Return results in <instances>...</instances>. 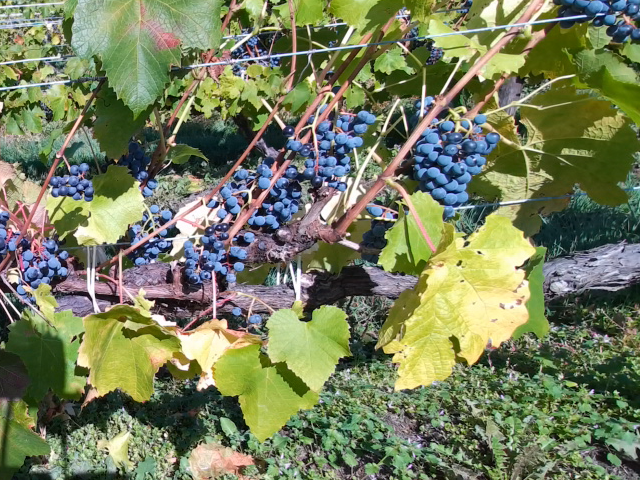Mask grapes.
I'll use <instances>...</instances> for the list:
<instances>
[{"instance_id":"obj_11","label":"grapes","mask_w":640,"mask_h":480,"mask_svg":"<svg viewBox=\"0 0 640 480\" xmlns=\"http://www.w3.org/2000/svg\"><path fill=\"white\" fill-rule=\"evenodd\" d=\"M365 211L373 217H382L384 215V217L389 220H392L394 218V215L391 212H386L384 214L382 209L373 203H370L369 206L365 209Z\"/></svg>"},{"instance_id":"obj_8","label":"grapes","mask_w":640,"mask_h":480,"mask_svg":"<svg viewBox=\"0 0 640 480\" xmlns=\"http://www.w3.org/2000/svg\"><path fill=\"white\" fill-rule=\"evenodd\" d=\"M174 226L175 224L167 230L159 233V235L155 236L142 247L130 252L127 255V259L129 261H134L136 266H145L156 262L158 260L159 253H164L166 249H170L172 247V242H165L163 238L170 236L169 230L173 229Z\"/></svg>"},{"instance_id":"obj_6","label":"grapes","mask_w":640,"mask_h":480,"mask_svg":"<svg viewBox=\"0 0 640 480\" xmlns=\"http://www.w3.org/2000/svg\"><path fill=\"white\" fill-rule=\"evenodd\" d=\"M274 165V159L272 157H267L262 161V165H257L255 167V172H248L245 168H238L234 172V180L236 182H241L245 180L247 183L253 181L257 175H260L258 178L257 188L259 190L268 188L270 186V178L273 176V170L271 167ZM229 182L223 188L219 190V195L225 199L224 205L228 208H219L216 211V216L219 219H226L228 215L238 214L241 211V207L239 205V199L234 197L233 193L240 192L247 188L245 183ZM242 198H246L248 193L246 191H242L240 193Z\"/></svg>"},{"instance_id":"obj_2","label":"grapes","mask_w":640,"mask_h":480,"mask_svg":"<svg viewBox=\"0 0 640 480\" xmlns=\"http://www.w3.org/2000/svg\"><path fill=\"white\" fill-rule=\"evenodd\" d=\"M455 129L453 121L426 128L416 142L415 168L409 178L420 181L419 190L431 193L435 201H443L444 216L453 218L455 206L468 200V183L472 175L482 172L487 156L499 146L500 135L466 138Z\"/></svg>"},{"instance_id":"obj_5","label":"grapes","mask_w":640,"mask_h":480,"mask_svg":"<svg viewBox=\"0 0 640 480\" xmlns=\"http://www.w3.org/2000/svg\"><path fill=\"white\" fill-rule=\"evenodd\" d=\"M228 229L229 225L226 222H222L219 225L213 223L205 228L201 243L217 252L210 253L205 250L201 255L199 252H195L191 241H186L183 244V255L187 258L184 261L183 274L189 278L190 282L198 285L202 283V280H211L213 278L212 271H219V274L224 276L227 282L236 280V275L229 272L228 268L219 261L224 260L228 254L232 257H237L239 260H246L247 250L241 247H232L229 251L224 249V241L230 238V234L227 232Z\"/></svg>"},{"instance_id":"obj_12","label":"grapes","mask_w":640,"mask_h":480,"mask_svg":"<svg viewBox=\"0 0 640 480\" xmlns=\"http://www.w3.org/2000/svg\"><path fill=\"white\" fill-rule=\"evenodd\" d=\"M421 104H422V100L420 98H417L414 102H413V107L416 109V112L410 117L409 119V123L415 127V125L418 123L419 120V116L421 114Z\"/></svg>"},{"instance_id":"obj_9","label":"grapes","mask_w":640,"mask_h":480,"mask_svg":"<svg viewBox=\"0 0 640 480\" xmlns=\"http://www.w3.org/2000/svg\"><path fill=\"white\" fill-rule=\"evenodd\" d=\"M129 153L123 155L118 159L120 166H127L128 174L135 180H146L149 177L146 165L151 161V158L144 155L145 150L140 146L138 141L130 140L128 142Z\"/></svg>"},{"instance_id":"obj_10","label":"grapes","mask_w":640,"mask_h":480,"mask_svg":"<svg viewBox=\"0 0 640 480\" xmlns=\"http://www.w3.org/2000/svg\"><path fill=\"white\" fill-rule=\"evenodd\" d=\"M142 226L140 224H135L133 227H131L128 230V234L130 235L131 239V246L140 242L142 239H144L148 233L146 231H142Z\"/></svg>"},{"instance_id":"obj_13","label":"grapes","mask_w":640,"mask_h":480,"mask_svg":"<svg viewBox=\"0 0 640 480\" xmlns=\"http://www.w3.org/2000/svg\"><path fill=\"white\" fill-rule=\"evenodd\" d=\"M487 121V116L485 114L476 115L474 117V122L476 126L473 127L474 134H481L483 132V127L481 125L485 124Z\"/></svg>"},{"instance_id":"obj_3","label":"grapes","mask_w":640,"mask_h":480,"mask_svg":"<svg viewBox=\"0 0 640 480\" xmlns=\"http://www.w3.org/2000/svg\"><path fill=\"white\" fill-rule=\"evenodd\" d=\"M10 214L7 211L0 213V254L6 255L8 251L22 252L19 255L21 277L16 281L17 293L27 303L35 301V295L27 290L28 285L31 289H37L39 284H49L51 277L66 276L68 269L61 264L60 260H68L70 258L69 251H59V244L51 237H43L41 239L42 249L40 254L34 252L32 248V240L30 238H21L19 231H13L7 234L8 221Z\"/></svg>"},{"instance_id":"obj_1","label":"grapes","mask_w":640,"mask_h":480,"mask_svg":"<svg viewBox=\"0 0 640 480\" xmlns=\"http://www.w3.org/2000/svg\"><path fill=\"white\" fill-rule=\"evenodd\" d=\"M376 121L377 115L367 110L358 112L356 116L340 114L334 121V126L341 129L337 134L330 130V120H322L315 128L317 151L312 142L302 144L296 138H291L295 133L294 126L286 125L281 132L283 138H289L284 142V148L307 158L303 162L306 169L298 172L295 165H289L273 190L247 220V224L270 225L272 229H277L283 221H291L293 213L299 211L301 183L305 180H311L313 187H320L325 183L334 190L345 191L347 184L334 179L350 173V157L347 154L364 144V138L360 135L366 134L368 127Z\"/></svg>"},{"instance_id":"obj_4","label":"grapes","mask_w":640,"mask_h":480,"mask_svg":"<svg viewBox=\"0 0 640 480\" xmlns=\"http://www.w3.org/2000/svg\"><path fill=\"white\" fill-rule=\"evenodd\" d=\"M556 5H561L557 9L559 16H573L587 14V19L575 21H561L559 27L567 30L574 27L575 23H585L592 21L594 25L607 28V34L612 36L614 41H624L629 38L640 40V28L628 24L626 19H618L616 12H624L633 21L640 20V0H554Z\"/></svg>"},{"instance_id":"obj_7","label":"grapes","mask_w":640,"mask_h":480,"mask_svg":"<svg viewBox=\"0 0 640 480\" xmlns=\"http://www.w3.org/2000/svg\"><path fill=\"white\" fill-rule=\"evenodd\" d=\"M89 170V164L87 162H81L78 165L72 164L69 167L70 175L53 177L49 184L53 189L51 190L52 197L67 196L71 197L74 201L84 199L86 202L93 200L94 186L93 181L80 178V175L86 173Z\"/></svg>"}]
</instances>
